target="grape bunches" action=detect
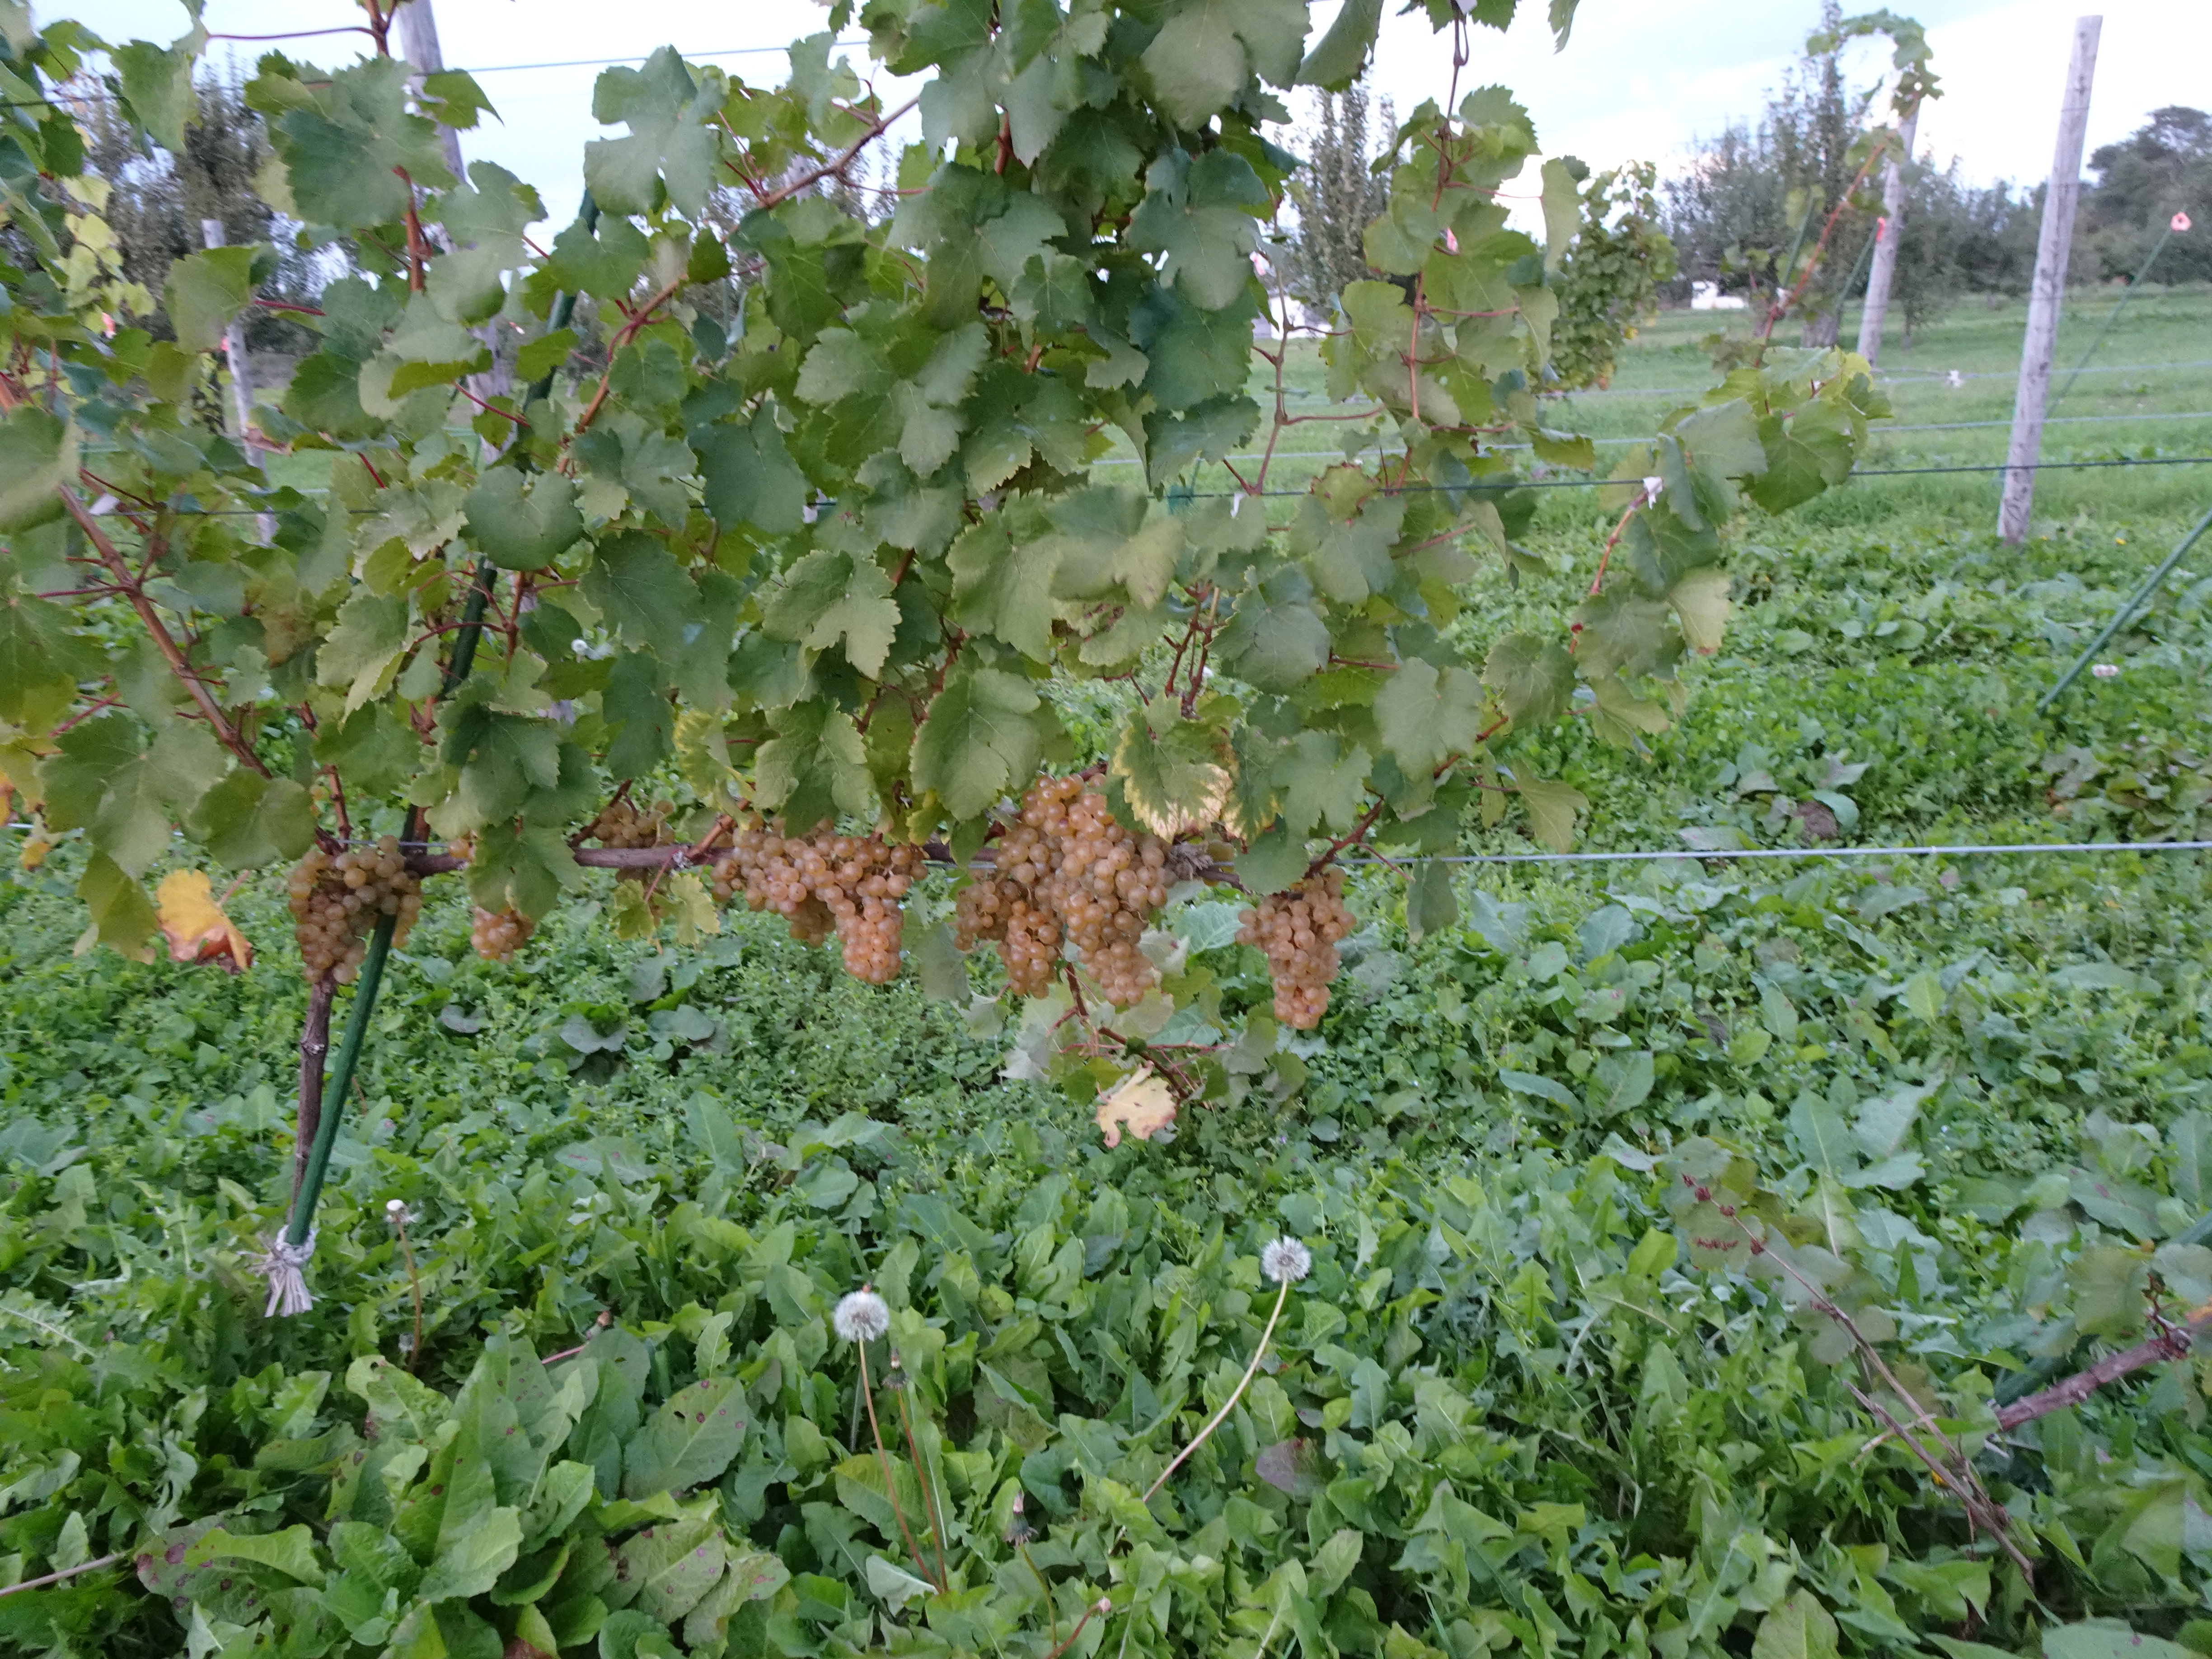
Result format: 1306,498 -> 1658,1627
703,856 -> 748,903
1022,771 -> 1172,911
592,799 -> 677,929
977,878 -> 1031,940
1235,866 -> 1357,1030
285,848 -> 366,985
952,880 -> 998,951
992,822 -> 1062,888
335,835 -> 422,951
1056,894 -> 1156,1007
784,889 -> 837,949
995,893 -> 1064,999
448,814 -> 537,961
1202,841 -> 1235,887
730,810 -> 835,913
802,833 -> 928,986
